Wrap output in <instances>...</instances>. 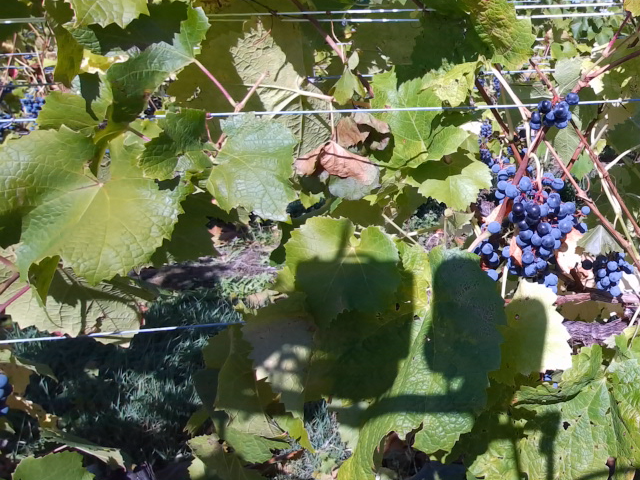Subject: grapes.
<instances>
[{
    "label": "grapes",
    "mask_w": 640,
    "mask_h": 480,
    "mask_svg": "<svg viewBox=\"0 0 640 480\" xmlns=\"http://www.w3.org/2000/svg\"><path fill=\"white\" fill-rule=\"evenodd\" d=\"M492 171L497 174L495 196L499 202L508 197L513 198L512 211L508 214L511 223H518L521 228L518 231V237L515 243L523 248L521 268L516 260L509 254L510 247L505 245L501 250V255L505 260L506 270L512 275L519 273L523 277H534L537 271H544L547 268V258H553L556 250L561 246L563 234H569L572 228L578 230L581 234L588 232L586 223H579L576 217L572 215L576 212V205L572 200H565L561 203V196L558 193L548 191H540L543 204L533 202L529 198L534 191L533 179L525 176L514 185L509 176L516 173V168L511 164L504 167L500 163L492 166ZM559 217L558 224L554 227L550 223H540L541 218H545L548 214Z\"/></svg>",
    "instance_id": "grapes-1"
},
{
    "label": "grapes",
    "mask_w": 640,
    "mask_h": 480,
    "mask_svg": "<svg viewBox=\"0 0 640 480\" xmlns=\"http://www.w3.org/2000/svg\"><path fill=\"white\" fill-rule=\"evenodd\" d=\"M582 267L585 270L591 269V275L597 281L596 289L599 292L607 291L611 296H618L621 293L618 283L623 273L631 274L634 271V266L625 260L622 253L595 256L592 261L585 259Z\"/></svg>",
    "instance_id": "grapes-2"
},
{
    "label": "grapes",
    "mask_w": 640,
    "mask_h": 480,
    "mask_svg": "<svg viewBox=\"0 0 640 480\" xmlns=\"http://www.w3.org/2000/svg\"><path fill=\"white\" fill-rule=\"evenodd\" d=\"M580 100L576 92L568 91L565 94V101L551 104L548 100H541L537 105V111L530 116V127L538 130L541 127L543 114V124L546 127L553 125L560 129H565L571 120L572 111L570 105H577Z\"/></svg>",
    "instance_id": "grapes-3"
},
{
    "label": "grapes",
    "mask_w": 640,
    "mask_h": 480,
    "mask_svg": "<svg viewBox=\"0 0 640 480\" xmlns=\"http://www.w3.org/2000/svg\"><path fill=\"white\" fill-rule=\"evenodd\" d=\"M473 253L478 256H483L486 262L491 266H498L500 264V256L494 251L493 242L490 239H485L483 242H478L475 248L472 249Z\"/></svg>",
    "instance_id": "grapes-4"
}]
</instances>
